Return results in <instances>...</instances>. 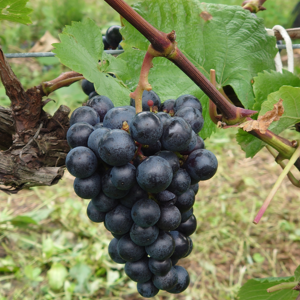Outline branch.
<instances>
[{
    "mask_svg": "<svg viewBox=\"0 0 300 300\" xmlns=\"http://www.w3.org/2000/svg\"><path fill=\"white\" fill-rule=\"evenodd\" d=\"M117 13L136 28L151 44L158 48L164 57L183 71L208 97L209 114L212 121L221 129L242 128L248 134L273 147L283 159L293 162L300 171V139L287 140L269 129L260 127L248 117L259 111H251L235 107L216 88V71H209V80L197 67L177 48L176 33H164L152 26L123 0H106Z\"/></svg>",
    "mask_w": 300,
    "mask_h": 300,
    "instance_id": "obj_1",
    "label": "branch"
},
{
    "mask_svg": "<svg viewBox=\"0 0 300 300\" xmlns=\"http://www.w3.org/2000/svg\"><path fill=\"white\" fill-rule=\"evenodd\" d=\"M0 78L7 99L10 101L9 110L12 112L16 123L21 129H29L35 125L41 114L44 96L81 81L83 76L75 71L62 72L57 78L44 81L24 91L17 75L8 64L4 51L0 49Z\"/></svg>",
    "mask_w": 300,
    "mask_h": 300,
    "instance_id": "obj_2",
    "label": "branch"
}]
</instances>
